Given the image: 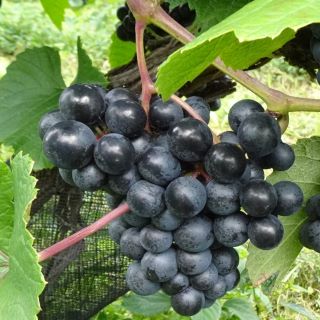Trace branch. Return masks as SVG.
<instances>
[{"instance_id":"30e6481e","label":"branch","mask_w":320,"mask_h":320,"mask_svg":"<svg viewBox=\"0 0 320 320\" xmlns=\"http://www.w3.org/2000/svg\"><path fill=\"white\" fill-rule=\"evenodd\" d=\"M213 66L220 71L230 75L242 85L247 87L267 104L266 113L273 117H278L280 133L285 131L289 123L288 111H320V99L297 98L279 92L258 80L251 78L245 71L236 68L235 72L232 66L227 68L221 56L214 60Z\"/></svg>"},{"instance_id":"170604dd","label":"branch","mask_w":320,"mask_h":320,"mask_svg":"<svg viewBox=\"0 0 320 320\" xmlns=\"http://www.w3.org/2000/svg\"><path fill=\"white\" fill-rule=\"evenodd\" d=\"M131 211L132 210L127 205V202L124 199H122L119 204V207L112 210L105 217L97 220L96 222L92 223L91 225L84 228L83 230H81V231L71 235L70 237L56 243L55 245L37 252L40 256L39 262L44 259L50 258L52 255L68 248L69 246L78 242L82 238H84V237L98 231L99 229L105 227L106 225H108L109 223H111L112 221H114L115 219L120 217L121 215H123L125 213H130Z\"/></svg>"},{"instance_id":"325d2c04","label":"branch","mask_w":320,"mask_h":320,"mask_svg":"<svg viewBox=\"0 0 320 320\" xmlns=\"http://www.w3.org/2000/svg\"><path fill=\"white\" fill-rule=\"evenodd\" d=\"M134 19H146L159 26L185 45L197 38L151 0H126Z\"/></svg>"}]
</instances>
